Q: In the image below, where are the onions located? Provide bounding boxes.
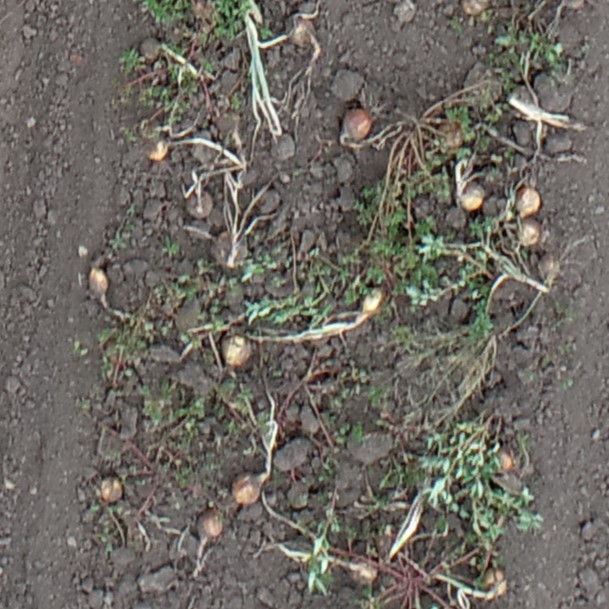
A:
[95,474,124,502]
[482,565,506,598]
[539,252,564,282]
[460,0,490,15]
[222,334,255,370]
[229,474,260,505]
[511,184,541,214]
[287,13,316,49]
[350,554,376,584]
[437,122,465,150]
[137,38,159,62]
[187,189,211,218]
[496,449,514,475]
[456,183,486,211]
[213,228,246,262]
[193,509,224,537]
[144,141,169,162]
[357,287,385,316]
[514,218,542,245]
[341,106,372,140]
[86,266,109,294]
